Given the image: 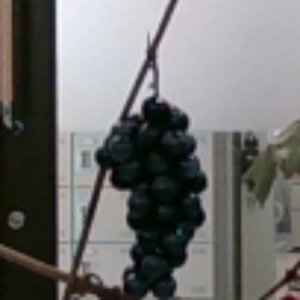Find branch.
Segmentation results:
<instances>
[{
  "label": "branch",
  "mask_w": 300,
  "mask_h": 300,
  "mask_svg": "<svg viewBox=\"0 0 300 300\" xmlns=\"http://www.w3.org/2000/svg\"><path fill=\"white\" fill-rule=\"evenodd\" d=\"M106 172L107 169L100 165L93 194L89 201L87 214L84 217V224L81 229V236L70 273L1 242L0 260L20 267L72 292L95 295L100 298V300H134V298L126 292H122L105 284L97 275H87L84 278L77 277Z\"/></svg>",
  "instance_id": "30e6481e"
},
{
  "label": "branch",
  "mask_w": 300,
  "mask_h": 300,
  "mask_svg": "<svg viewBox=\"0 0 300 300\" xmlns=\"http://www.w3.org/2000/svg\"><path fill=\"white\" fill-rule=\"evenodd\" d=\"M177 3H178V0H169V3L166 7L165 14L161 20V23L159 24V26L155 32V35L153 36V39L148 46L147 58L144 60L143 64L141 65V70L138 73L134 87L131 90L130 95L123 107V110L121 112L118 122H121L124 118L130 116V110L133 106L134 101L137 98L138 93L140 92L144 78L147 74V70H148V68L152 67V53L153 52L157 53L159 43L167 31L168 23L175 11V6L177 5Z\"/></svg>",
  "instance_id": "325d2c04"
}]
</instances>
